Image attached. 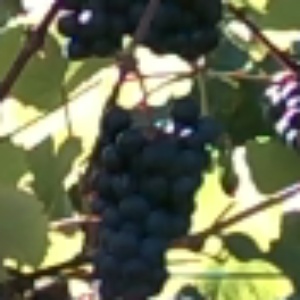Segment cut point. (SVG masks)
<instances>
[{
	"label": "cut point",
	"instance_id": "1",
	"mask_svg": "<svg viewBox=\"0 0 300 300\" xmlns=\"http://www.w3.org/2000/svg\"><path fill=\"white\" fill-rule=\"evenodd\" d=\"M130 73H134L135 76L137 77L138 84L141 90V100L139 103H137L134 106V109L140 112H144L145 109L148 107V89L146 87L144 78L142 77L141 73L139 72V67L135 66L133 68L129 69Z\"/></svg>",
	"mask_w": 300,
	"mask_h": 300
}]
</instances>
